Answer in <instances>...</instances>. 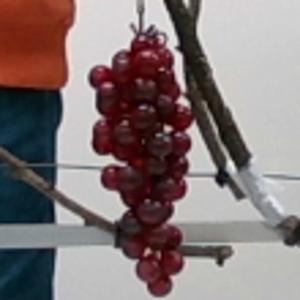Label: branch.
Instances as JSON below:
<instances>
[{
  "label": "branch",
  "mask_w": 300,
  "mask_h": 300,
  "mask_svg": "<svg viewBox=\"0 0 300 300\" xmlns=\"http://www.w3.org/2000/svg\"><path fill=\"white\" fill-rule=\"evenodd\" d=\"M187 1L186 5L185 0H162L177 39L174 50L182 59V97L194 112L196 128L216 168L214 184L222 190L227 187L236 203L249 198L252 207L269 220L283 245L300 249V217L276 207L254 164L253 153L216 84L198 33L203 0ZM222 145L245 190L237 181Z\"/></svg>",
  "instance_id": "branch-1"
},
{
  "label": "branch",
  "mask_w": 300,
  "mask_h": 300,
  "mask_svg": "<svg viewBox=\"0 0 300 300\" xmlns=\"http://www.w3.org/2000/svg\"><path fill=\"white\" fill-rule=\"evenodd\" d=\"M179 251L184 258H202L213 261L217 268H223L226 260L236 255L232 245H186L183 243Z\"/></svg>",
  "instance_id": "branch-3"
},
{
  "label": "branch",
  "mask_w": 300,
  "mask_h": 300,
  "mask_svg": "<svg viewBox=\"0 0 300 300\" xmlns=\"http://www.w3.org/2000/svg\"><path fill=\"white\" fill-rule=\"evenodd\" d=\"M0 158L14 171V173L26 184L37 189L39 192L56 200L61 207L69 211L72 215L78 216L83 219V228H95L100 232L111 235L113 238L112 249L122 251L123 241L118 234V220L114 219L113 222L103 215L89 210L82 204H79L74 198L67 196L52 184L48 183L41 176L31 170L26 161L19 160L12 155L9 151L5 150L0 145Z\"/></svg>",
  "instance_id": "branch-2"
}]
</instances>
